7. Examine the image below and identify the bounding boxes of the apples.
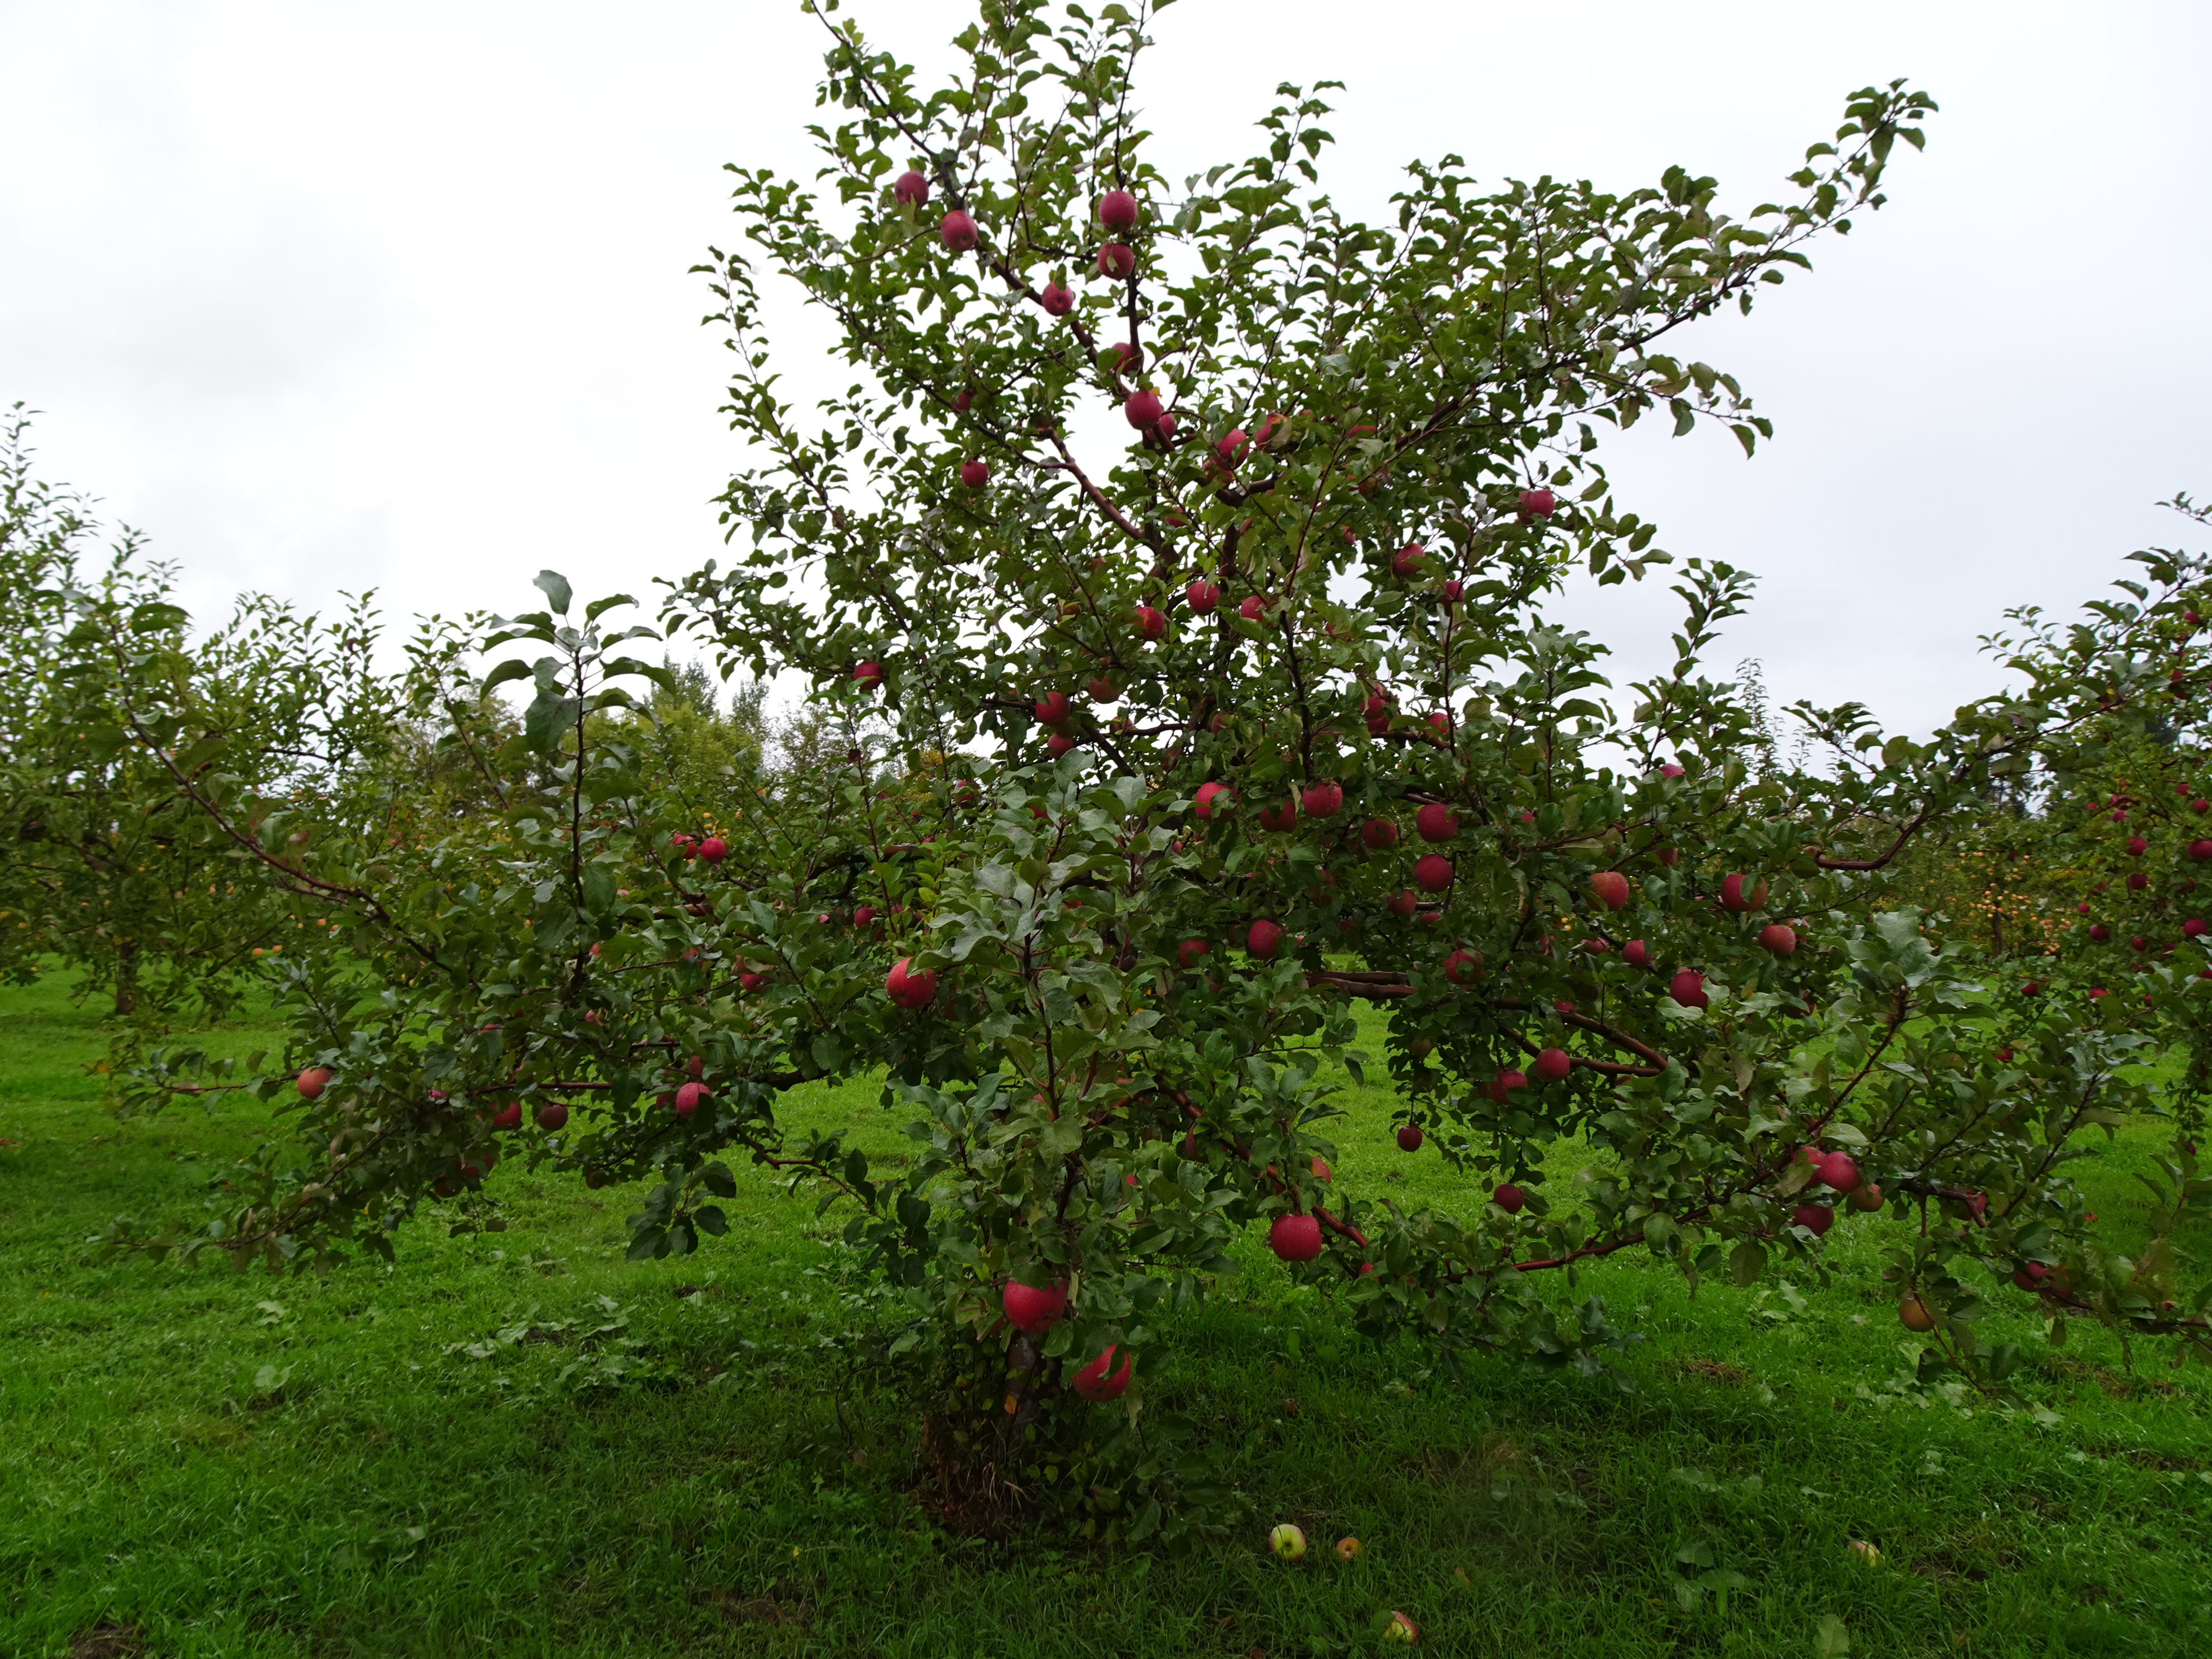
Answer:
[1407,1033,1431,1059]
[1495,804,1537,847]
[1235,513,1270,543]
[1550,996,1579,1024]
[937,207,979,253]
[851,904,880,934]
[608,888,632,909]
[1414,798,1463,844]
[1645,830,1684,876]
[584,939,620,967]
[1033,690,1073,730]
[1941,1176,1989,1223]
[1583,982,1603,1001]
[1330,519,1358,552]
[976,1298,1009,1340]
[1097,240,1139,284]
[1085,664,1122,706]
[1255,409,1292,453]
[1513,486,1557,527]
[1002,1259,1071,1333]
[1108,712,1137,743]
[475,1090,525,1132]
[851,657,884,693]
[1238,594,1281,634]
[1897,1294,1941,1331]
[1183,1110,1238,1165]
[960,457,991,491]
[433,1167,467,1199]
[2082,1211,2099,1226]
[1386,883,1418,919]
[1186,577,1221,619]
[1355,471,1389,507]
[1024,1090,1060,1129]
[892,169,931,212]
[1160,503,1192,533]
[1581,868,1630,915]
[424,1082,450,1105]
[674,1080,713,1122]
[941,980,987,1024]
[948,384,974,413]
[1128,604,1166,644]
[1355,1254,1388,1292]
[653,1087,677,1118]
[1417,711,1459,747]
[346,1095,384,1127]
[1300,860,1347,904]
[922,836,939,853]
[1170,829,1209,865]
[1780,985,1815,1021]
[2010,1259,2060,1293]
[727,953,757,980]
[1409,890,1451,929]
[1124,388,1164,432]
[1193,779,1244,825]
[1394,1120,1425,1154]
[1789,1196,1836,1243]
[1256,723,1282,746]
[1173,934,1212,975]
[1787,845,1825,879]
[1441,945,1487,987]
[1755,924,1797,962]
[1412,851,1454,895]
[534,1100,571,1134]
[683,1043,725,1082]
[950,775,985,816]
[1601,1016,1630,1037]
[1435,579,1466,607]
[1207,424,1250,473]
[1487,1063,1529,1109]
[1778,1138,1827,1193]
[515,1066,534,1084]
[1667,968,1719,1014]
[1591,840,1619,867]
[1243,916,1287,964]
[2038,1274,2075,1305]
[670,834,700,862]
[1389,542,1428,575]
[2155,1300,2182,1322]
[1490,1181,1527,1218]
[1619,935,1657,971]
[1718,870,1770,915]
[1024,797,1059,826]
[1613,1075,1644,1104]
[1158,744,1190,774]
[1299,405,1318,426]
[458,1139,501,1179]
[1053,597,1086,628]
[1294,1153,1334,1192]
[1301,776,1345,821]
[1097,187,1139,234]
[1347,418,1384,455]
[330,1125,376,1170]
[737,962,774,996]
[1651,761,1691,800]
[883,951,945,1012]
[1256,792,1299,836]
[1357,809,1400,852]
[1210,710,1244,742]
[1037,277,1078,318]
[479,1024,528,1060]
[1046,731,1077,763]
[1105,1171,1144,1203]
[1108,341,1146,380]
[597,820,613,835]
[1528,926,1568,967]
[1065,1339,1132,1405]
[295,1063,337,1101]
[1477,1072,1502,1102]
[1267,1208,1325,1264]
[700,836,729,864]
[581,1004,610,1029]
[975,1275,998,1296]
[1058,892,1082,915]
[1349,676,1388,724]
[1532,1044,1571,1087]
[2182,608,2204,628]
[1579,933,1612,968]
[1813,1149,1863,1194]
[1362,700,1404,741]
